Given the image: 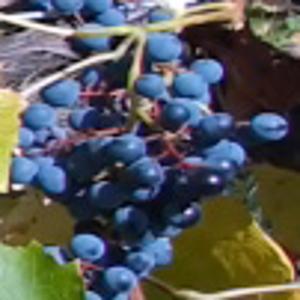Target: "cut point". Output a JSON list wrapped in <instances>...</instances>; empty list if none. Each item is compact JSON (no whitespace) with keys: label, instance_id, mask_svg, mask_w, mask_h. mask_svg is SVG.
<instances>
[{"label":"cut point","instance_id":"1","mask_svg":"<svg viewBox=\"0 0 300 300\" xmlns=\"http://www.w3.org/2000/svg\"><path fill=\"white\" fill-rule=\"evenodd\" d=\"M134 37H138L136 44V51L132 62V67L130 69V77L137 76L140 72V64L143 53V47L146 39V34H135V35H126L124 42L114 51L113 57L118 59L121 57L126 49L130 47L134 42Z\"/></svg>","mask_w":300,"mask_h":300}]
</instances>
